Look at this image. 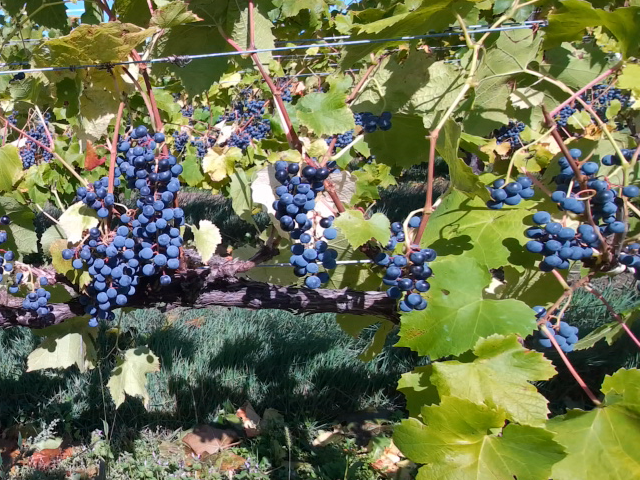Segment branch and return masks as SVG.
<instances>
[{
  "label": "branch",
  "instance_id": "1",
  "mask_svg": "<svg viewBox=\"0 0 640 480\" xmlns=\"http://www.w3.org/2000/svg\"><path fill=\"white\" fill-rule=\"evenodd\" d=\"M490 33H483L475 42L473 50H472V58H471V69L469 72V76L466 80L463 88L458 92L455 96L454 100L450 104L445 116L441 119L437 127L432 131L430 135L429 142V154H428V179H427V197H426V207L424 208L423 218L419 222L417 235L415 237L414 243L418 244L422 237V232L426 228V223L428 221V216L432 213L431 208V199H432V182L434 178L433 170H434V150L436 149L437 138L436 135L442 130L447 120L450 118L453 113L457 103L463 97V95L467 92L469 87L471 86V82L474 78V74L476 71V61H477V52L479 50L480 44L484 41V39L488 38Z\"/></svg>",
  "mask_w": 640,
  "mask_h": 480
},
{
  "label": "branch",
  "instance_id": "2",
  "mask_svg": "<svg viewBox=\"0 0 640 480\" xmlns=\"http://www.w3.org/2000/svg\"><path fill=\"white\" fill-rule=\"evenodd\" d=\"M510 74H531L535 77L540 78L541 80H543L548 84H552L556 86L558 89L564 91L569 97H573L577 101L581 102V104L584 105V107L590 112V115L595 120V123L599 131L602 133L603 136L607 138L608 144L613 148V150L619 156V159L621 161V173L624 177V183L625 184L630 183V164L626 161L624 154L621 152L620 148L616 145L615 138L611 136V133L609 129L606 127V124L604 123V121L600 120L598 114L595 112L593 107L582 96H579L577 93L572 92L561 81H556L554 79L546 77L542 73L537 72L533 69H508V70L499 71L497 73H493L492 75H489V76H483L478 79V82L483 83L486 81H492L496 78H500L501 76L510 75Z\"/></svg>",
  "mask_w": 640,
  "mask_h": 480
},
{
  "label": "branch",
  "instance_id": "3",
  "mask_svg": "<svg viewBox=\"0 0 640 480\" xmlns=\"http://www.w3.org/2000/svg\"><path fill=\"white\" fill-rule=\"evenodd\" d=\"M541 112H542L543 116L545 117L546 122L548 123L547 128L549 129L551 135L556 140V143H557L558 147L564 153L566 159L568 160V162L570 163V165L574 169L575 174L577 175L578 179L581 181V195H582V199H583V204H584V206H585V208L587 210L588 219L590 221V226L592 227V230L594 231V233L598 237L599 242L601 243L604 251L607 253V255L610 258H613L614 254L611 251V249H610L609 245L607 244V242L604 240L603 234L600 232L599 228L597 227V225L595 223V219H594L593 212H592V207L590 206L589 201H588V199L590 198V193L588 191V186H587V180H586L587 176L583 175L581 173L579 167L577 166L576 162L574 161V159L572 158L570 152L568 151V147L565 145V143L563 141V138L561 137L560 133L558 132L556 122L553 119L552 115L550 114L548 106L546 104H543L541 106Z\"/></svg>",
  "mask_w": 640,
  "mask_h": 480
},
{
  "label": "branch",
  "instance_id": "4",
  "mask_svg": "<svg viewBox=\"0 0 640 480\" xmlns=\"http://www.w3.org/2000/svg\"><path fill=\"white\" fill-rule=\"evenodd\" d=\"M252 58H253V61H254L255 65L258 67V70L262 74V76L264 78V82L266 83L267 87L272 91V93L274 94L275 98L277 99V105H278L279 109L281 110V112H282V114L284 116L285 124H286V127L288 129V132L290 133V135H291V137L293 139V143H294L295 149L300 152L302 157L305 159V161L311 167H315L316 163L308 156L307 149H306L304 143L303 142L299 143V141H298V136L296 135V132L294 131L293 126L291 125L289 113L286 110L285 106L283 105V100H282V97H281L280 93L275 88V86L271 83V81L269 79V76L267 74V71L264 69L262 63L260 62V60L258 58V56L257 55H252Z\"/></svg>",
  "mask_w": 640,
  "mask_h": 480
},
{
  "label": "branch",
  "instance_id": "5",
  "mask_svg": "<svg viewBox=\"0 0 640 480\" xmlns=\"http://www.w3.org/2000/svg\"><path fill=\"white\" fill-rule=\"evenodd\" d=\"M0 122L3 123L5 126L11 128L14 132H16L18 135L28 139L29 141H31L32 143H34L35 145H37L38 147L50 152L51 154H54L56 156V158L59 160V162L75 177L78 179V181L84 186V187H88L89 183L72 167L70 166L67 161L63 158V156L56 150L53 149L52 147L48 146L45 143L40 142L39 140H37L36 138H34L33 136H31L30 134L22 131L19 127H17L15 124L9 122L7 119H5L3 116H0Z\"/></svg>",
  "mask_w": 640,
  "mask_h": 480
},
{
  "label": "branch",
  "instance_id": "6",
  "mask_svg": "<svg viewBox=\"0 0 640 480\" xmlns=\"http://www.w3.org/2000/svg\"><path fill=\"white\" fill-rule=\"evenodd\" d=\"M126 99L122 98L118 104L117 107V114H116V118H115V122H114V134H113V139H112V143H111V153H110V162H109V178H108V191L112 192L113 191V181H114V164L116 161L115 155H116V146H117V142H118V137H119V133H120V128H119V124L121 121V117H122V110H123V106L125 105Z\"/></svg>",
  "mask_w": 640,
  "mask_h": 480
},
{
  "label": "branch",
  "instance_id": "7",
  "mask_svg": "<svg viewBox=\"0 0 640 480\" xmlns=\"http://www.w3.org/2000/svg\"><path fill=\"white\" fill-rule=\"evenodd\" d=\"M148 71V66L145 64L143 66H138L139 75L144 78L145 86L147 87V95L150 98L151 108L154 115V120L156 123L157 132L161 133L164 131V127L162 124V119L159 117L158 109L156 106L155 96L152 92V83L149 80V76L146 73Z\"/></svg>",
  "mask_w": 640,
  "mask_h": 480
},
{
  "label": "branch",
  "instance_id": "8",
  "mask_svg": "<svg viewBox=\"0 0 640 480\" xmlns=\"http://www.w3.org/2000/svg\"><path fill=\"white\" fill-rule=\"evenodd\" d=\"M598 271L597 267H594L583 279L577 282L573 287H571L564 295L560 296L555 303L550 308L549 312L545 314L541 319L538 320V324L542 325L545 323L557 310L560 303L570 297L576 290H578L582 285L589 281L593 275H595Z\"/></svg>",
  "mask_w": 640,
  "mask_h": 480
},
{
  "label": "branch",
  "instance_id": "9",
  "mask_svg": "<svg viewBox=\"0 0 640 480\" xmlns=\"http://www.w3.org/2000/svg\"><path fill=\"white\" fill-rule=\"evenodd\" d=\"M623 217H624V230L616 246V250H615L616 258L620 257L622 246L629 233V215H628V196L627 195L623 196Z\"/></svg>",
  "mask_w": 640,
  "mask_h": 480
},
{
  "label": "branch",
  "instance_id": "10",
  "mask_svg": "<svg viewBox=\"0 0 640 480\" xmlns=\"http://www.w3.org/2000/svg\"><path fill=\"white\" fill-rule=\"evenodd\" d=\"M323 182L325 184L324 189L326 191V194L332 200L333 204L337 207L338 211L340 213H344L345 205L342 203L336 189L332 186V183L327 178H324Z\"/></svg>",
  "mask_w": 640,
  "mask_h": 480
},
{
  "label": "branch",
  "instance_id": "11",
  "mask_svg": "<svg viewBox=\"0 0 640 480\" xmlns=\"http://www.w3.org/2000/svg\"><path fill=\"white\" fill-rule=\"evenodd\" d=\"M254 1L250 0L248 3V14H249V38L250 45L248 46L249 50L255 49V36H254V11H253Z\"/></svg>",
  "mask_w": 640,
  "mask_h": 480
},
{
  "label": "branch",
  "instance_id": "12",
  "mask_svg": "<svg viewBox=\"0 0 640 480\" xmlns=\"http://www.w3.org/2000/svg\"><path fill=\"white\" fill-rule=\"evenodd\" d=\"M163 34L162 30H158L157 32H155L146 48V50L144 51L143 55H142V59H147V57L149 56L154 44L156 43V40L158 37H160Z\"/></svg>",
  "mask_w": 640,
  "mask_h": 480
}]
</instances>
